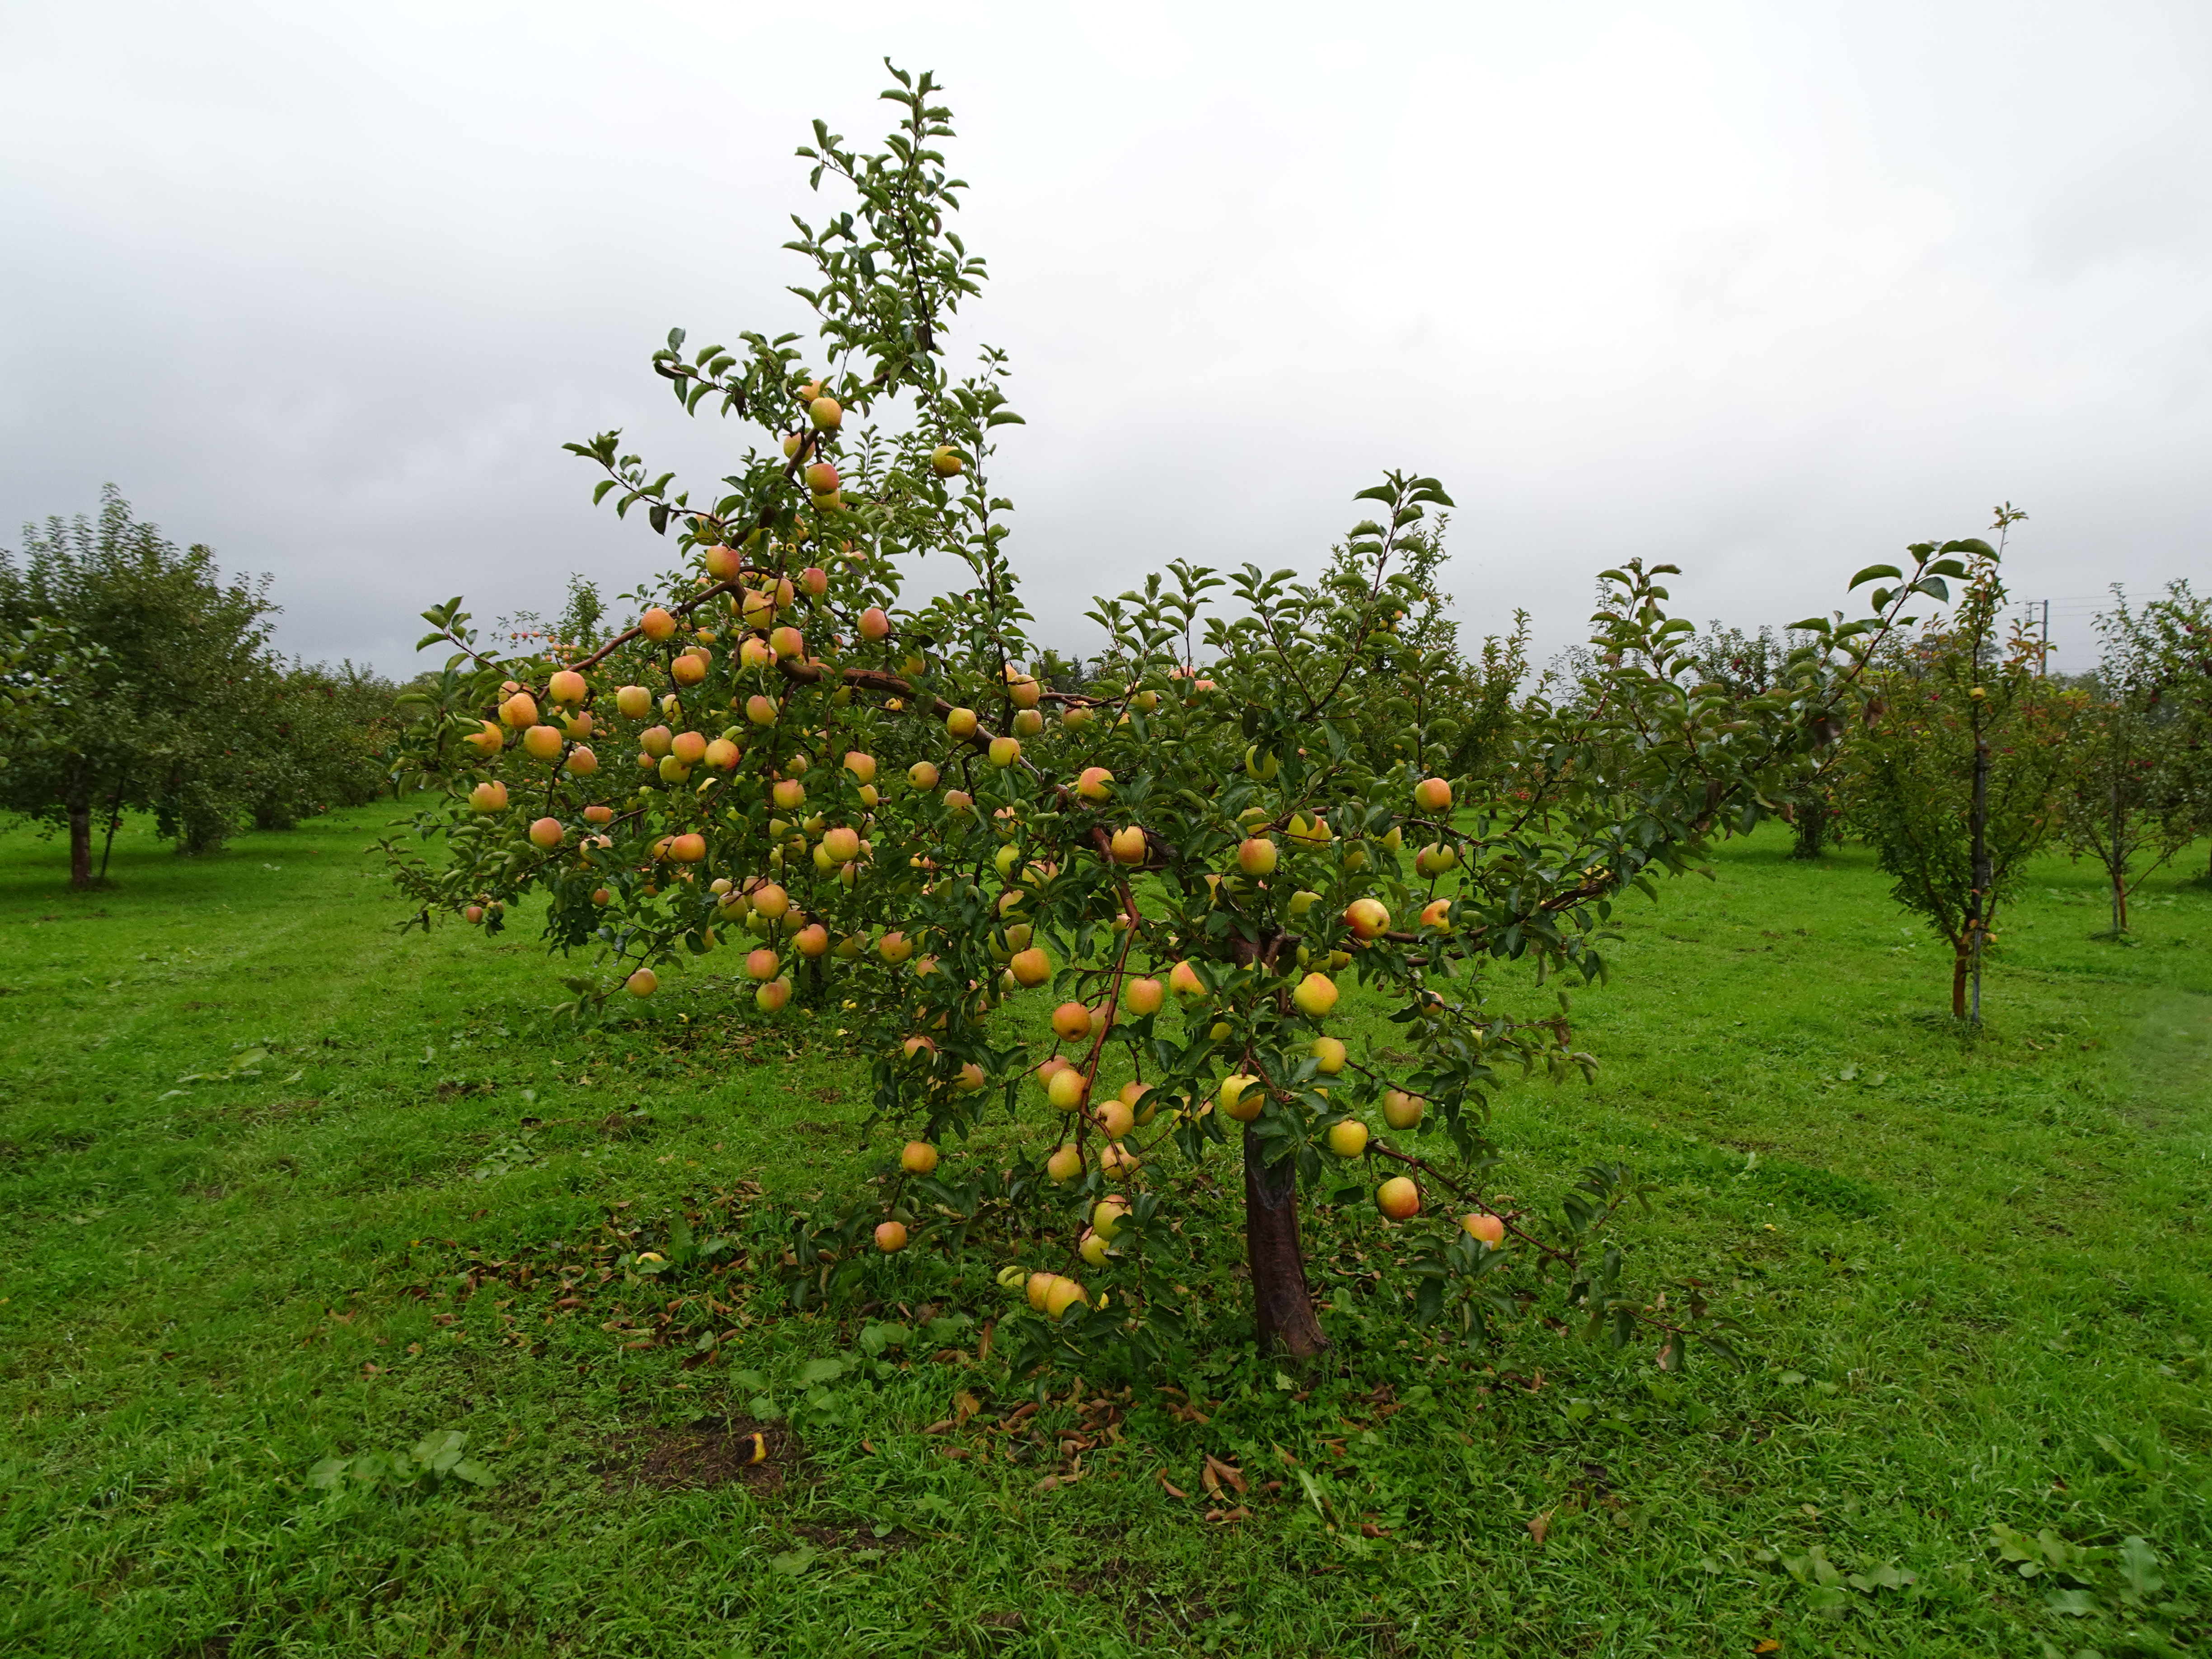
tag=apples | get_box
[692,509,730,550]
[799,1008,814,1021]
[904,1032,938,1069]
[992,660,1021,690]
[777,835,808,865]
[470,887,493,908]
[463,903,485,924]
[1291,969,1343,1020]
[900,1138,943,1181]
[1306,1035,1347,1075]
[855,785,883,814]
[1245,745,1277,780]
[996,885,1040,926]
[916,927,947,954]
[1169,666,1196,682]
[901,829,931,858]
[914,1000,957,1035]
[733,771,765,801]
[959,996,991,1022]
[991,802,1031,844]
[1454,1210,1509,1258]
[836,860,867,890]
[845,550,870,575]
[1079,1227,1122,1268]
[1465,1028,1490,1051]
[1191,873,1223,901]
[854,605,894,646]
[1010,945,1053,991]
[994,841,1028,885]
[651,832,680,870]
[521,721,565,764]
[464,774,508,819]
[1116,1080,1163,1128]
[983,917,1034,964]
[837,538,852,554]
[1285,812,1324,850]
[835,683,863,711]
[737,570,752,587]
[1021,856,1060,895]
[564,744,601,781]
[742,588,779,632]
[743,876,777,907]
[1027,1271,1061,1313]
[941,788,979,823]
[1170,1090,1214,1138]
[555,710,596,741]
[768,974,793,1000]
[1418,841,1458,874]
[768,812,800,841]
[1411,983,1449,1020]
[978,985,1003,1008]
[767,621,805,664]
[917,884,937,905]
[1343,897,1391,945]
[1109,825,1148,868]
[846,812,877,835]
[906,759,940,793]
[743,945,782,985]
[484,897,512,918]
[952,868,975,896]
[1089,1193,1138,1244]
[1416,893,1462,940]
[926,1072,955,1105]
[990,968,1019,999]
[520,779,546,801]
[694,576,712,591]
[835,1027,848,1042]
[754,980,788,1015]
[615,684,654,724]
[909,849,935,876]
[1235,807,1274,839]
[639,605,678,646]
[1289,889,1323,922]
[639,876,665,901]
[529,814,566,855]
[948,1061,989,1096]
[658,692,688,722]
[778,750,811,779]
[637,785,659,808]
[1413,777,1452,815]
[586,884,612,908]
[841,749,878,787]
[1090,1097,1137,1140]
[1330,836,1363,873]
[1382,1082,1431,1131]
[1294,1079,1333,1116]
[496,676,534,704]
[1122,975,1168,1020]
[795,562,830,605]
[938,877,966,907]
[708,876,735,900]
[782,426,819,468]
[1217,1068,1266,1126]
[701,733,744,777]
[1122,681,1156,714]
[671,832,707,866]
[1298,748,1306,754]
[1364,819,1401,858]
[928,653,965,689]
[685,923,719,958]
[916,959,949,994]
[810,484,842,515]
[681,872,702,894]
[1186,680,1220,706]
[700,707,732,734]
[735,635,779,677]
[780,544,798,566]
[579,793,617,825]
[626,796,647,818]
[741,521,771,551]
[884,698,902,711]
[577,829,617,868]
[760,574,799,612]
[716,890,750,926]
[729,695,745,713]
[1578,864,1614,902]
[781,904,811,937]
[856,836,877,859]
[989,737,1020,767]
[762,845,781,868]
[496,690,539,734]
[1112,712,1131,726]
[669,730,710,769]
[677,642,721,667]
[626,965,663,1001]
[1104,880,1132,908]
[1049,1001,1093,1045]
[658,753,698,789]
[1012,709,1045,738]
[809,394,843,438]
[1375,1174,1423,1224]
[637,748,659,770]
[1044,1142,1088,1184]
[821,630,847,657]
[803,462,842,498]
[790,920,831,961]
[842,998,858,1015]
[824,826,861,863]
[1411,844,1443,880]
[1084,999,1126,1035]
[461,717,505,760]
[772,510,812,546]
[1045,1276,1085,1320]
[946,707,978,741]
[872,1218,912,1255]
[695,624,723,648]
[743,744,769,772]
[1237,960,1272,994]
[892,643,929,679]
[725,585,761,616]
[721,725,749,748]
[1327,1118,1371,1161]
[703,544,743,586]
[1075,767,1119,807]
[1007,674,1041,711]
[753,883,789,921]
[798,380,835,417]
[878,929,912,967]
[772,779,810,812]
[927,444,966,480]
[745,692,779,731]
[693,775,727,799]
[1294,937,1334,976]
[1111,913,1140,939]
[663,802,682,819]
[770,544,778,554]
[545,669,589,711]
[807,691,830,712]
[638,722,674,762]
[1046,1066,1094,1115]
[1064,782,1092,811]
[832,926,866,960]
[797,725,830,758]
[1166,955,1218,1011]
[1033,1051,1073,1097]
[1239,838,1277,874]
[1099,1143,1142,1184]
[800,803,832,835]
[695,800,715,819]
[807,839,831,874]
[670,653,708,691]
[1061,700,1095,731]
